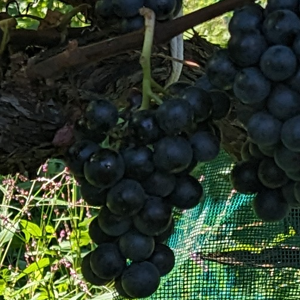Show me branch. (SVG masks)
Segmentation results:
<instances>
[{
	"label": "branch",
	"instance_id": "obj_2",
	"mask_svg": "<svg viewBox=\"0 0 300 300\" xmlns=\"http://www.w3.org/2000/svg\"><path fill=\"white\" fill-rule=\"evenodd\" d=\"M254 2L255 0H220L185 16L158 23L153 28V47L163 46L191 27L235 10L240 5Z\"/></svg>",
	"mask_w": 300,
	"mask_h": 300
},
{
	"label": "branch",
	"instance_id": "obj_1",
	"mask_svg": "<svg viewBox=\"0 0 300 300\" xmlns=\"http://www.w3.org/2000/svg\"><path fill=\"white\" fill-rule=\"evenodd\" d=\"M145 41V28L98 41L88 47H78L49 58L31 68V73L39 78H59L72 71L95 64L97 61L122 53L141 49Z\"/></svg>",
	"mask_w": 300,
	"mask_h": 300
}]
</instances>
